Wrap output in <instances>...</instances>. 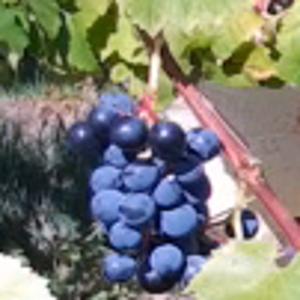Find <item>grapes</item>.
<instances>
[{"instance_id": "obj_1", "label": "grapes", "mask_w": 300, "mask_h": 300, "mask_svg": "<svg viewBox=\"0 0 300 300\" xmlns=\"http://www.w3.org/2000/svg\"><path fill=\"white\" fill-rule=\"evenodd\" d=\"M65 140L101 164L90 171L85 194L92 219L107 231L104 277L124 284L136 273L155 297L191 288L220 250L203 231L214 195L206 164L220 151L218 138L171 120L148 130L131 98L104 94L86 122L66 128Z\"/></svg>"}, {"instance_id": "obj_2", "label": "grapes", "mask_w": 300, "mask_h": 300, "mask_svg": "<svg viewBox=\"0 0 300 300\" xmlns=\"http://www.w3.org/2000/svg\"><path fill=\"white\" fill-rule=\"evenodd\" d=\"M240 231L247 241H252L260 234V222L254 211L244 209L240 213Z\"/></svg>"}]
</instances>
